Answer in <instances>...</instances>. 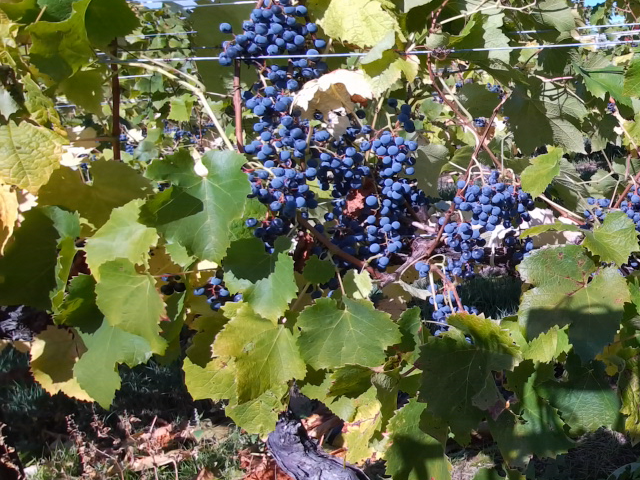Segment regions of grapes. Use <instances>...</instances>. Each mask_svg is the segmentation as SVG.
Segmentation results:
<instances>
[{"instance_id": "grapes-1", "label": "grapes", "mask_w": 640, "mask_h": 480, "mask_svg": "<svg viewBox=\"0 0 640 480\" xmlns=\"http://www.w3.org/2000/svg\"><path fill=\"white\" fill-rule=\"evenodd\" d=\"M263 94L265 97H254V94L249 90H244L240 94V98L244 101V106L248 110L253 109V113L256 116L263 117L252 124V129L259 133L262 141L269 142L275 139L273 132L281 123L284 128L278 131V136L282 139L281 141L276 140L274 146L272 144L263 145L261 141H252L250 144L244 145L243 151L247 155L257 156L263 162V166L265 168L269 167L276 177L270 181L267 189L258 183V179H267L269 177L267 170H254L248 174L252 193L259 195L263 199H268L270 202L268 209L271 212L281 211V216L273 219L270 222V226L257 227L253 232V236L261 238L264 250L269 254H273L275 252L274 241L279 236L291 232L289 220L295 218L298 208L315 209L318 206V201L313 199L315 193L309 190L306 178L309 181H314L317 178L318 187L322 191H327L330 188L328 171L331 169L334 173L331 196L336 200L331 202L334 208L332 212H327L324 215V219L332 221L335 216L341 228H348L346 236H341V232L336 230L331 243L348 254H354L356 248L353 245L356 242L364 241L369 245L361 247L359 255L361 257H368L371 254L381 255L375 260L376 267L379 270H385L391 262V258L387 253L394 254L403 247V243L400 241L402 235L396 231L401 228V223L399 222L400 210L398 208L405 203L403 196L408 195L412 202L410 204L412 209H418L427 204V198L422 189L414 191L406 179L394 181L392 178H388L395 173H400L405 163L409 166L416 165L417 160L412 156L407 157V155L409 151L418 149V143L404 141L401 136L392 137L390 131H383L381 136L378 139H374L372 143L369 140H364L359 144L361 152H367L372 148L377 156H382V163L390 166L383 167L378 171V175L381 177L378 181V184L382 187L381 195L386 197L381 202L382 207L379 209V214L383 217L379 220V226H374L377 218L369 214L366 218L369 226L367 227V233H365V229L360 227V224L352 217L343 215L341 209L346 204L343 199L346 193H349L352 189H360L363 186V177H367L370 174V168L367 165H358L356 168L351 169L354 163H361L364 160V156L356 151L354 146H347L345 140L340 138L338 141L333 140L331 142V146L336 150L338 156L345 154V157L339 160L330 153L321 152L319 154L321 163L319 164L315 158H308L305 171L298 172L277 167V163L270 159L269 156L277 153L276 148H293L291 153L288 150L279 152L278 160L284 162L286 166L291 164L289 160L291 155L294 158H303L305 156V151L309 149V143L305 141L308 135L304 132L302 126L308 128L310 123L307 118L301 117L302 113L299 110H294L292 116L285 114L279 118V122H273L271 120L272 115L284 113L286 107L294 101V98L285 96L272 86H266L263 89ZM284 187L286 189H294L296 191L295 197L291 194H285L283 201H279L282 198L281 189Z\"/></svg>"}, {"instance_id": "grapes-2", "label": "grapes", "mask_w": 640, "mask_h": 480, "mask_svg": "<svg viewBox=\"0 0 640 480\" xmlns=\"http://www.w3.org/2000/svg\"><path fill=\"white\" fill-rule=\"evenodd\" d=\"M499 172L492 170L490 177L487 179L485 187L470 184L463 193V198L454 196L452 203L455 209L460 212H470L471 223L465 222L459 224L451 221L445 228L443 233L446 236V242L452 251L461 254L458 259L445 260L444 276L449 282H453L449 271L456 277L462 279H473L475 272L473 270H463V263L466 261H476L480 263L485 257V250L482 247H475L478 241H485L484 233L494 231L496 225H500L503 220V226L510 228L512 219L516 218L518 223H523L530 219L527 210L534 208V201L528 193L523 189L516 191L514 196V186L512 184L497 183Z\"/></svg>"}, {"instance_id": "grapes-3", "label": "grapes", "mask_w": 640, "mask_h": 480, "mask_svg": "<svg viewBox=\"0 0 640 480\" xmlns=\"http://www.w3.org/2000/svg\"><path fill=\"white\" fill-rule=\"evenodd\" d=\"M277 4L263 0L264 7L258 5L254 8L249 20L240 26L243 33L233 38L234 45L229 40L220 43L223 49L217 54L220 66L229 67L235 55H279L285 49L289 54L301 52L306 45V37L315 33L318 25L315 22L296 23V18L309 15L304 4L288 5V0H277Z\"/></svg>"}, {"instance_id": "grapes-4", "label": "grapes", "mask_w": 640, "mask_h": 480, "mask_svg": "<svg viewBox=\"0 0 640 480\" xmlns=\"http://www.w3.org/2000/svg\"><path fill=\"white\" fill-rule=\"evenodd\" d=\"M311 61H317L320 59H307ZM306 59H291L290 64L293 67L300 68L294 70L291 73L292 78H288V69L285 66H278L271 64L268 67L269 71L264 73V76L268 78L278 89H285L294 91L299 87V82L296 80L299 75L303 78H318L320 72H326L328 70V64L326 62H317L312 67L308 66Z\"/></svg>"}, {"instance_id": "grapes-5", "label": "grapes", "mask_w": 640, "mask_h": 480, "mask_svg": "<svg viewBox=\"0 0 640 480\" xmlns=\"http://www.w3.org/2000/svg\"><path fill=\"white\" fill-rule=\"evenodd\" d=\"M428 302L430 305H433L434 302L436 303V309L435 311H433L431 313V319L437 323H442L438 325L439 329H436L433 332L434 336H438L439 334H442L443 332H447L450 330V327L447 326V322L446 319L447 317H450L454 314V312H457L460 310L459 306H455L454 308H452L450 305H444V294L443 293H438L435 296H429L428 297Z\"/></svg>"}, {"instance_id": "grapes-6", "label": "grapes", "mask_w": 640, "mask_h": 480, "mask_svg": "<svg viewBox=\"0 0 640 480\" xmlns=\"http://www.w3.org/2000/svg\"><path fill=\"white\" fill-rule=\"evenodd\" d=\"M621 211L634 221L635 229L640 231V187L633 185L629 190L621 203Z\"/></svg>"}, {"instance_id": "grapes-7", "label": "grapes", "mask_w": 640, "mask_h": 480, "mask_svg": "<svg viewBox=\"0 0 640 480\" xmlns=\"http://www.w3.org/2000/svg\"><path fill=\"white\" fill-rule=\"evenodd\" d=\"M400 112L397 115V120L399 122L404 123L403 128L408 133H413L416 129V125L413 120H411V106L409 104H402L400 106Z\"/></svg>"}, {"instance_id": "grapes-8", "label": "grapes", "mask_w": 640, "mask_h": 480, "mask_svg": "<svg viewBox=\"0 0 640 480\" xmlns=\"http://www.w3.org/2000/svg\"><path fill=\"white\" fill-rule=\"evenodd\" d=\"M372 131V126L370 124H365L363 125L361 128L358 127L357 125L354 126H348L346 128V133L351 137H357L359 136L361 133H363L364 135L369 134Z\"/></svg>"}, {"instance_id": "grapes-9", "label": "grapes", "mask_w": 640, "mask_h": 480, "mask_svg": "<svg viewBox=\"0 0 640 480\" xmlns=\"http://www.w3.org/2000/svg\"><path fill=\"white\" fill-rule=\"evenodd\" d=\"M535 241L533 239H527L525 241L524 250L522 252H514L512 259L514 261H521L524 256H528L534 248Z\"/></svg>"}, {"instance_id": "grapes-10", "label": "grapes", "mask_w": 640, "mask_h": 480, "mask_svg": "<svg viewBox=\"0 0 640 480\" xmlns=\"http://www.w3.org/2000/svg\"><path fill=\"white\" fill-rule=\"evenodd\" d=\"M313 135L311 136V140L313 142L325 143L331 138V134L327 131H319L317 127L312 129Z\"/></svg>"}, {"instance_id": "grapes-11", "label": "grapes", "mask_w": 640, "mask_h": 480, "mask_svg": "<svg viewBox=\"0 0 640 480\" xmlns=\"http://www.w3.org/2000/svg\"><path fill=\"white\" fill-rule=\"evenodd\" d=\"M313 46L317 49H325L327 47V41L323 38H315L313 40ZM317 49L310 48L305 50V54H320Z\"/></svg>"}, {"instance_id": "grapes-12", "label": "grapes", "mask_w": 640, "mask_h": 480, "mask_svg": "<svg viewBox=\"0 0 640 480\" xmlns=\"http://www.w3.org/2000/svg\"><path fill=\"white\" fill-rule=\"evenodd\" d=\"M431 269V265L429 263H425L424 261H419L414 264V270L419 272V275L423 278L429 276V271Z\"/></svg>"}, {"instance_id": "grapes-13", "label": "grapes", "mask_w": 640, "mask_h": 480, "mask_svg": "<svg viewBox=\"0 0 640 480\" xmlns=\"http://www.w3.org/2000/svg\"><path fill=\"white\" fill-rule=\"evenodd\" d=\"M593 215L599 221H603L605 218V211L601 208H595L593 210ZM593 215L590 213L589 210H584L582 213V216L585 217L587 220H591L593 218Z\"/></svg>"}]
</instances>
